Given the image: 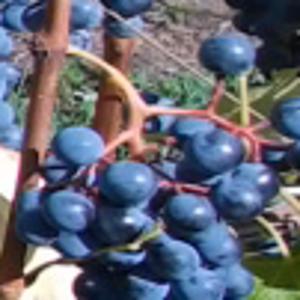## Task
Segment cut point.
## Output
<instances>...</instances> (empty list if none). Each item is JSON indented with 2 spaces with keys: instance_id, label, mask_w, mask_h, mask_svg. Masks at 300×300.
Segmentation results:
<instances>
[{
  "instance_id": "cut-point-1",
  "label": "cut point",
  "mask_w": 300,
  "mask_h": 300,
  "mask_svg": "<svg viewBox=\"0 0 300 300\" xmlns=\"http://www.w3.org/2000/svg\"><path fill=\"white\" fill-rule=\"evenodd\" d=\"M69 55L78 60H85L95 64L97 67L108 71L113 78L123 87L126 93L128 105L127 110V127L135 130L141 127V119L154 118L160 114L158 109L148 106L143 101L142 94L131 84L127 77H124L114 65L104 61L103 58L96 54L83 51L78 47L67 45Z\"/></svg>"
}]
</instances>
